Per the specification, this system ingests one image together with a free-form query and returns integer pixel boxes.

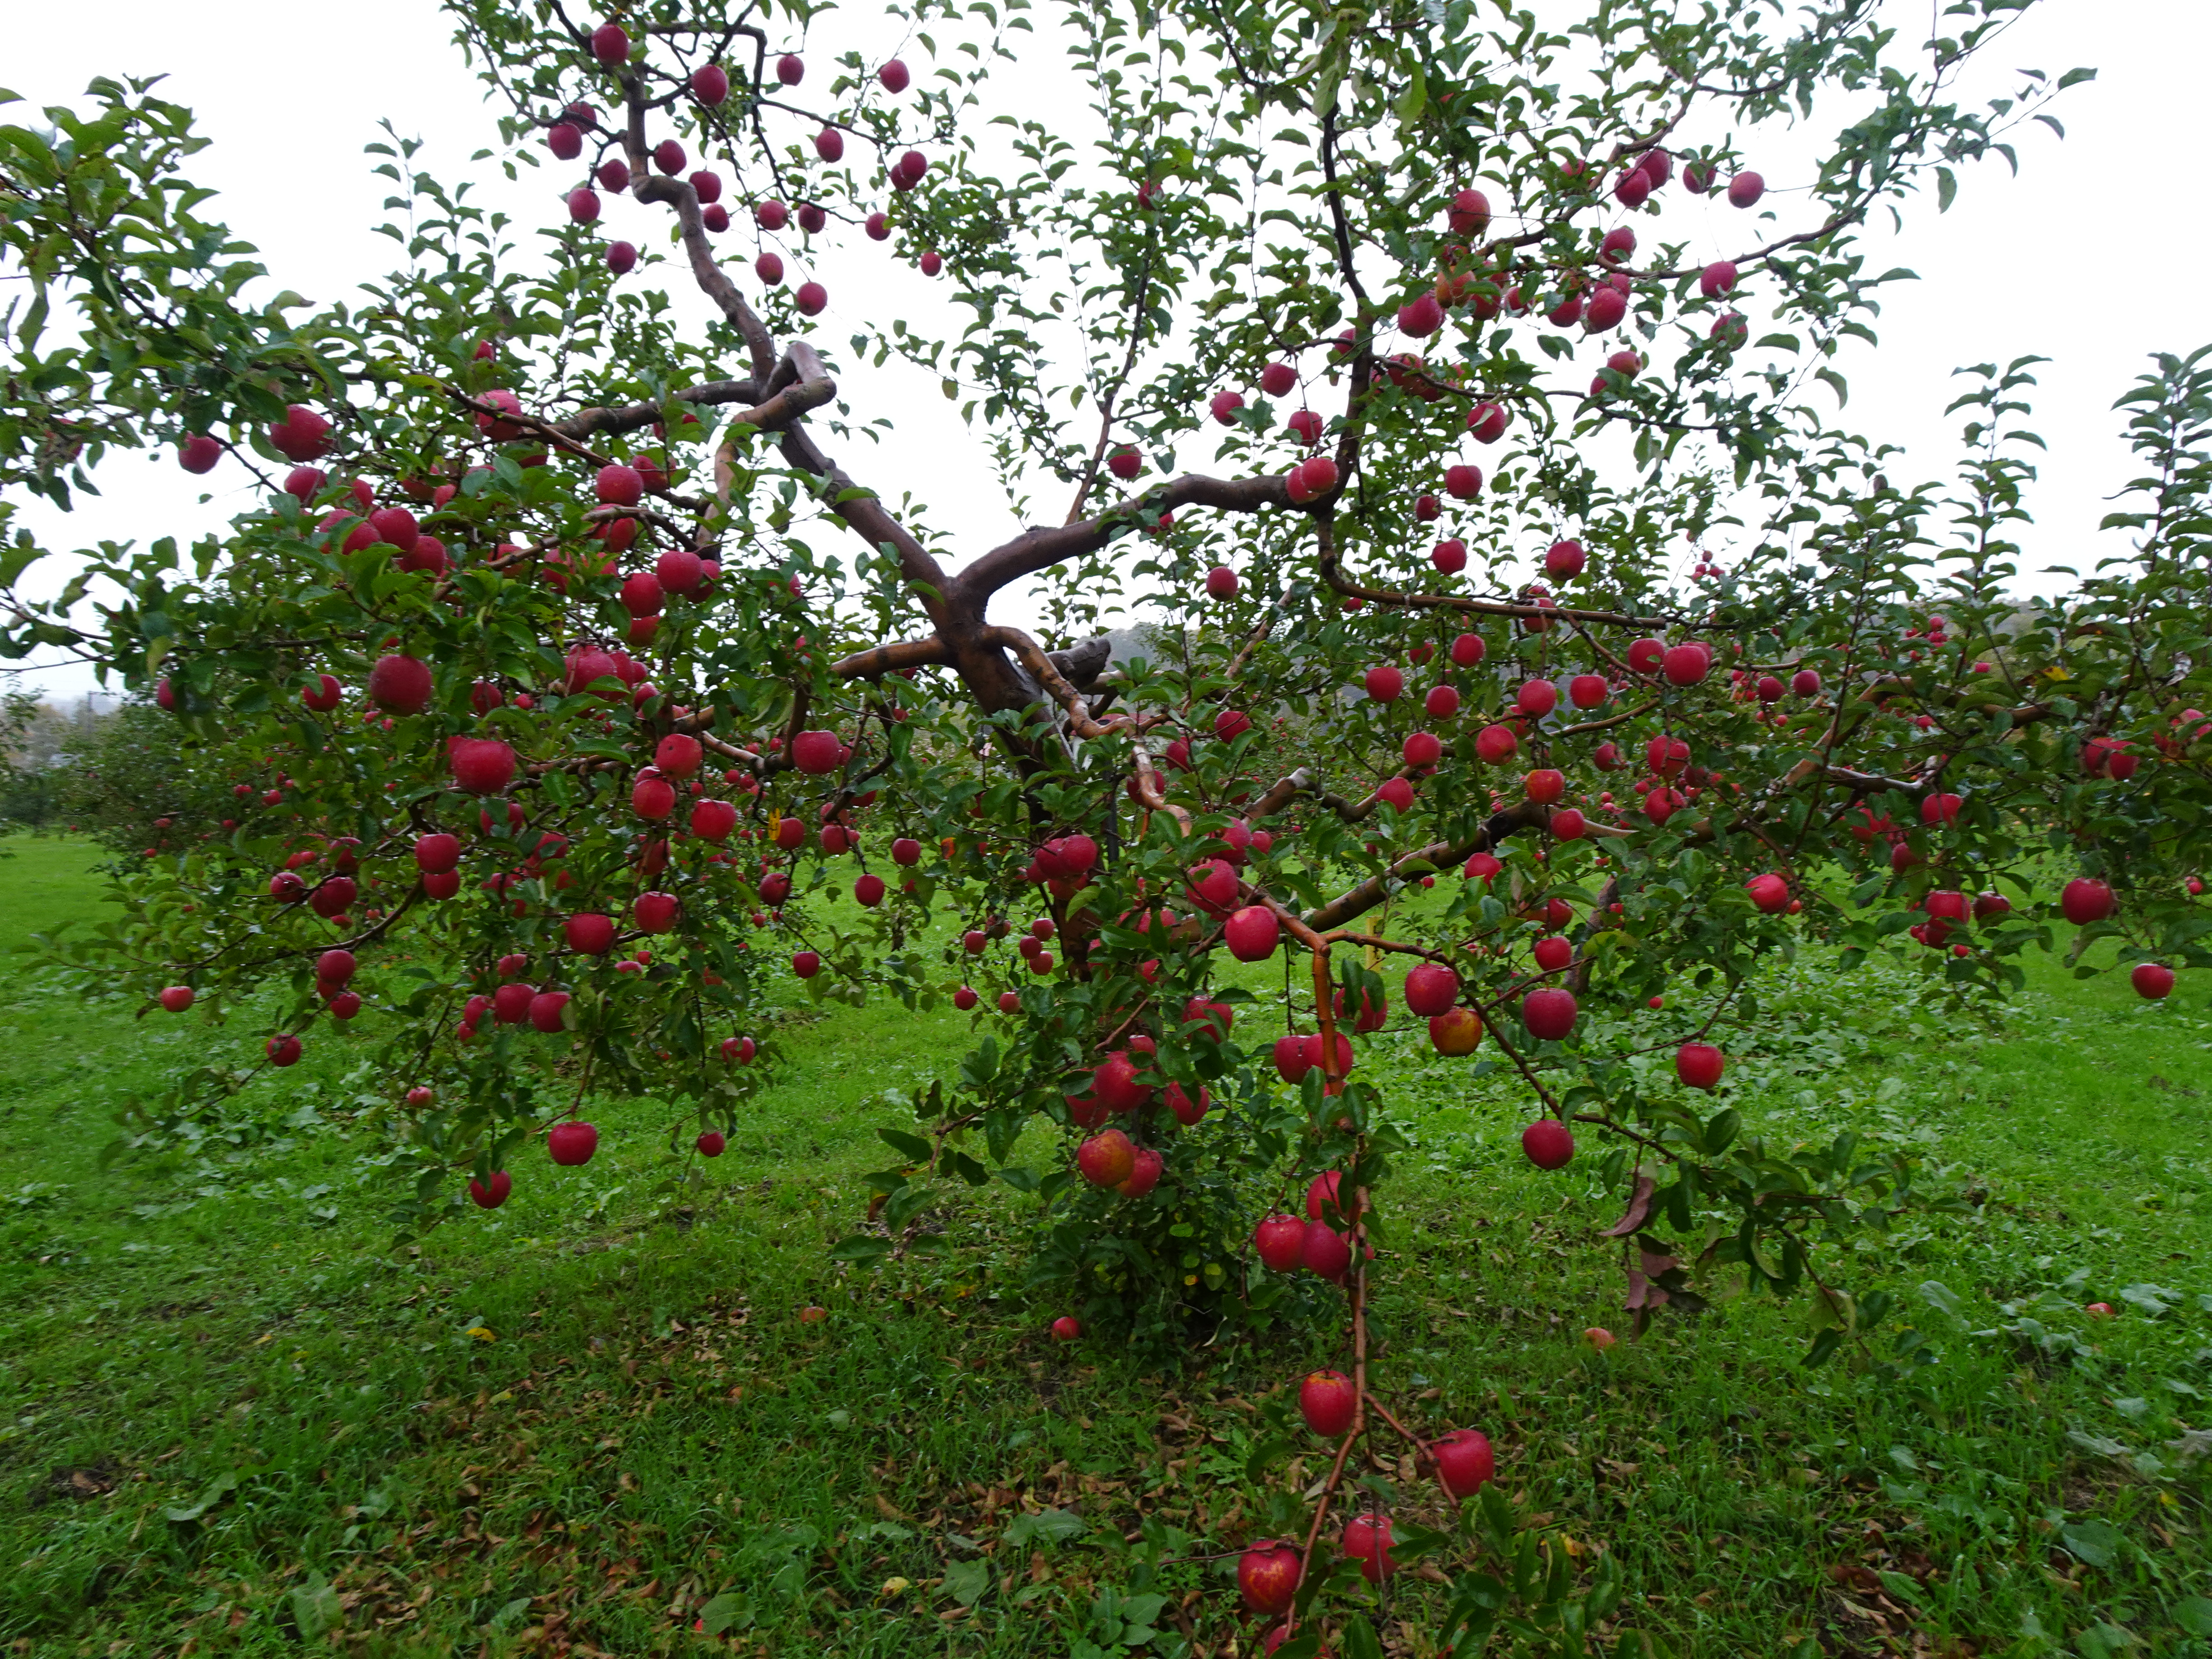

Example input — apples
[1468,401,1506,444]
[1607,351,1640,380]
[686,559,720,601]
[636,705,683,719]
[1432,1429,1494,1499]
[1014,866,1028,880]
[401,465,441,498]
[1300,1031,1353,1081]
[702,966,722,985]
[607,650,633,699]
[2083,737,2139,780]
[469,966,489,981]
[1427,685,1459,717]
[477,389,522,440]
[452,739,515,793]
[316,978,348,1000]
[1548,287,1582,327]
[847,830,860,843]
[530,991,572,1033]
[1449,189,1490,237]
[673,830,686,842]
[740,774,755,789]
[300,851,315,863]
[786,635,820,678]
[776,55,804,86]
[439,567,469,604]
[1087,938,1111,979]
[1429,1006,1483,1057]
[633,445,676,491]
[690,782,703,795]
[1523,598,1556,633]
[1344,597,1363,613]
[549,1121,597,1166]
[534,831,568,863]
[598,464,644,507]
[1302,458,1338,492]
[567,913,613,956]
[486,544,525,577]
[1096,1050,1153,1113]
[1461,616,1469,627]
[1645,788,1686,828]
[1677,1042,1724,1090]
[792,951,819,978]
[1256,1214,1306,1272]
[1973,891,2009,921]
[1048,874,1088,901]
[904,878,918,893]
[370,509,417,551]
[1439,92,1454,103]
[821,825,850,854]
[1590,378,1607,397]
[441,735,466,774]
[653,422,665,441]
[496,954,527,977]
[821,803,849,826]
[879,59,910,94]
[1224,906,1279,962]
[158,678,175,710]
[657,1052,669,1060]
[615,961,642,974]
[1772,866,1792,881]
[690,797,736,843]
[703,204,728,233]
[569,644,599,655]
[764,569,801,609]
[751,785,765,798]
[1288,410,1323,447]
[2180,708,2212,739]
[682,414,700,424]
[893,709,908,722]
[691,65,729,106]
[567,188,601,226]
[607,240,636,274]
[1121,1035,1155,1057]
[1436,266,1476,309]
[760,873,791,906]
[965,930,987,955]
[1496,972,1521,1000]
[334,479,372,511]
[526,853,549,878]
[1035,838,1069,879]
[1634,150,1671,191]
[1131,877,1162,907]
[753,913,767,927]
[1061,1069,1099,1111]
[1032,918,1054,942]
[517,443,548,469]
[319,858,328,863]
[970,792,986,819]
[1683,158,1715,194]
[1335,328,1355,356]
[769,738,782,751]
[1309,1080,1356,1133]
[1710,312,1747,351]
[480,873,528,920]
[1562,270,1590,297]
[792,730,840,775]
[796,282,827,317]
[1854,807,1891,843]
[1594,272,1630,300]
[1388,353,1421,386]
[855,874,884,907]
[1445,465,1482,499]
[1145,511,1174,537]
[816,129,843,163]
[726,769,740,783]
[630,661,646,683]
[1227,779,1248,805]
[424,868,458,901]
[1594,744,1621,772]
[1416,495,1440,521]
[941,837,956,859]
[626,834,670,875]
[458,1021,477,1047]
[1925,924,1952,950]
[473,340,493,361]
[892,667,916,680]
[1663,645,1708,687]
[393,559,404,572]
[621,573,664,617]
[302,833,324,841]
[1019,936,1042,959]
[1685,765,1706,787]
[1518,900,1548,930]
[1581,303,1594,332]
[1365,667,1402,703]
[773,910,782,922]
[1215,710,1252,744]
[1475,725,1518,766]
[1264,1623,1330,1659]
[1409,642,1433,665]
[1452,633,1485,668]
[1115,1145,1163,1198]
[1534,935,1572,973]
[1073,1105,1109,1129]
[179,432,219,474]
[798,203,826,234]
[1183,994,1232,1045]
[371,655,431,716]
[730,858,738,865]
[1252,830,1273,854]
[403,535,445,576]
[2153,719,2187,753]
[1160,910,1177,941]
[625,613,659,647]
[1419,764,1437,776]
[408,1087,432,1107]
[301,674,341,712]
[632,682,657,708]
[1238,1541,1302,1615]
[516,692,533,710]
[543,549,575,595]
[272,404,332,462]
[495,983,537,1024]
[564,101,597,135]
[853,790,876,808]
[1209,899,1240,922]
[1369,369,1382,399]
[1925,890,1970,931]
[1885,826,1910,848]
[637,951,651,965]
[635,891,681,934]
[900,150,927,182]
[284,466,327,504]
[708,855,720,862]
[555,870,579,890]
[1286,466,1318,503]
[271,508,311,538]
[1614,167,1649,207]
[1559,159,1591,183]
[380,637,399,650]
[1433,541,1467,575]
[266,1034,301,1067]
[470,680,502,716]
[580,552,618,575]
[999,992,1021,1015]
[2061,877,2112,926]
[1331,1243,1374,1287]
[1628,638,1665,674]
[318,949,355,985]
[1464,853,1503,890]
[1504,287,1532,317]
[435,484,457,509]
[1891,842,1928,873]
[1029,951,1053,975]
[758,200,787,230]
[635,766,673,784]
[1026,860,1047,884]
[977,842,987,857]
[746,742,760,755]
[330,992,360,1020]
[1550,808,1585,843]
[699,1132,725,1158]
[1398,288,1445,338]
[656,734,702,780]
[1517,679,1556,719]
[632,779,675,820]
[1138,181,1163,211]
[1731,668,1759,689]
[284,837,292,847]
[285,854,301,869]
[1204,816,1252,866]
[482,804,522,836]
[2132,963,2175,999]
[1569,675,1607,710]
[1921,793,1971,829]
[160,986,194,1012]
[1681,641,1711,669]
[323,876,358,907]
[563,651,617,713]
[598,158,629,193]
[755,252,783,285]
[1483,259,1509,288]
[328,837,363,874]
[1647,734,1690,776]
[1743,874,1789,915]
[331,914,352,924]
[1212,391,1244,427]
[689,170,722,204]
[1375,777,1414,813]
[587,503,636,552]
[470,1169,511,1209]
[1701,261,1738,297]
[1109,446,1141,478]
[1733,643,1741,654]
[1302,1219,1358,1279]
[1165,1080,1209,1125]
[2183,875,2203,896]
[1525,769,1564,805]
[865,212,891,241]
[1440,244,1469,266]
[921,252,941,276]
[1545,540,1584,581]
[1239,855,1252,867]
[1301,1370,1356,1437]
[985,914,1010,939]
[1793,669,1821,698]
[1403,732,1440,769]
[721,1036,755,1065]
[654,139,686,175]
[657,550,703,595]
[1261,362,1296,397]
[721,850,731,863]
[318,509,380,556]
[1186,859,1239,913]
[1413,374,1439,402]
[553,441,582,453]
[1078,1130,1134,1188]
[1728,171,1764,208]
[1448,364,1465,387]
[1134,959,1162,999]
[1306,1171,1361,1221]
[1206,566,1238,601]
[561,922,570,939]
[547,123,582,160]
[417,833,460,874]
[1524,987,1576,1040]
[1522,1119,1575,1171]
[1274,1035,1311,1085]
[513,867,528,878]
[1333,986,1387,1030]
[464,995,500,1031]
[1367,832,1382,856]
[444,550,457,570]
[1756,677,1783,702]
[595,713,614,732]
[268,872,305,903]
[1588,288,1626,330]
[311,885,346,919]
[955,986,977,1011]
[1437,669,1455,688]
[889,163,916,191]
[1127,770,1164,805]
[1601,228,1635,264]
[837,746,850,766]
[1548,896,1573,931]
[1343,1514,1401,1583]
[1116,911,1150,934]
[1503,705,1529,738]
[1468,293,1501,320]
[1058,835,1097,874]
[1099,1006,1124,1023]
[892,837,920,866]
[591,25,628,66]
[1526,585,1550,599]
[774,818,805,850]
[1166,736,1193,774]
[1405,963,1458,1016]
[465,465,497,502]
